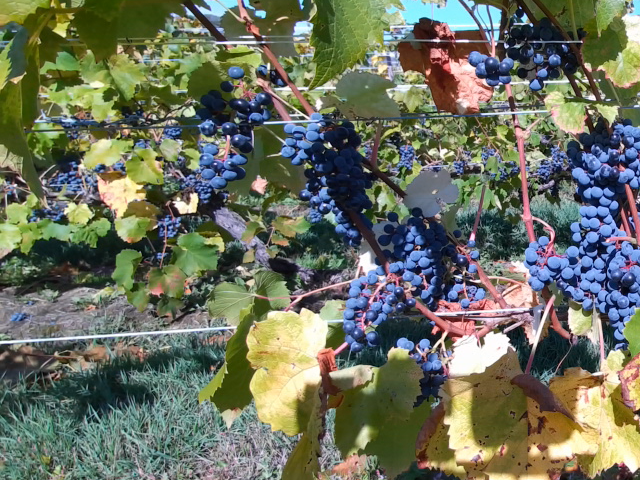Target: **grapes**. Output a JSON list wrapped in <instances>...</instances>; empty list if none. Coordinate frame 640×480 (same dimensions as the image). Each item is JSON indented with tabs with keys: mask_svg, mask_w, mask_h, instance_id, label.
Segmentation results:
<instances>
[{
	"mask_svg": "<svg viewBox=\"0 0 640 480\" xmlns=\"http://www.w3.org/2000/svg\"><path fill=\"white\" fill-rule=\"evenodd\" d=\"M566 156L576 166L572 177L579 182L576 194L587 202L579 208L581 222L569 226L571 241L580 243L564 251V257H540L550 239L540 236L523 253L529 268L528 286L541 291L556 282L565 297L582 302V310L594 306L607 312L613 338L625 341L624 323L631 320L640 307V246L606 239L626 237L619 230L618 208L627 201L623 186L640 189V127L632 119L616 123L607 133L599 117L595 132L579 134V143L567 144Z\"/></svg>",
	"mask_w": 640,
	"mask_h": 480,
	"instance_id": "01657485",
	"label": "grapes"
},
{
	"mask_svg": "<svg viewBox=\"0 0 640 480\" xmlns=\"http://www.w3.org/2000/svg\"><path fill=\"white\" fill-rule=\"evenodd\" d=\"M414 218H409L407 224H385L384 232L378 237L380 246H389L393 243L394 251L385 249L383 254L392 260L389 270L397 273L404 282H410L413 286L411 294L420 297L430 311L438 308L439 300L448 303H456L461 309H468L471 304L484 299L487 290L476 284L466 286V298L459 299V292L464 289V281L454 278L449 286L443 283L442 275L446 272V266L441 263L443 257H451V261L459 267H464L468 273L476 274L477 266L469 263V258L461 254L457 247L449 244L447 230L437 221L429 224V229L420 218L423 210L419 206L412 209ZM386 290L379 301L370 305V310L365 312V319L373 325H380L387 320L389 313L395 310L404 313L406 306L414 308L416 299L409 297L404 302H397V298L404 294V288L393 282L386 284Z\"/></svg>",
	"mask_w": 640,
	"mask_h": 480,
	"instance_id": "b958b902",
	"label": "grapes"
},
{
	"mask_svg": "<svg viewBox=\"0 0 640 480\" xmlns=\"http://www.w3.org/2000/svg\"><path fill=\"white\" fill-rule=\"evenodd\" d=\"M330 123H312L307 126L285 125L283 132L288 136L285 146L281 149V156L290 159V163L300 166L305 160H312L315 168H307L305 176L309 178L306 189L299 191L302 201H309L310 209L308 217L311 222H320L326 213L335 214V232L345 237L348 246H357L360 243L361 234L356 225L349 221L348 213L339 206L332 189L323 188L333 182V175L329 173L333 169V163L326 161L323 154L325 145L319 141L324 139L322 127H328Z\"/></svg>",
	"mask_w": 640,
	"mask_h": 480,
	"instance_id": "0513c4c2",
	"label": "grapes"
},
{
	"mask_svg": "<svg viewBox=\"0 0 640 480\" xmlns=\"http://www.w3.org/2000/svg\"><path fill=\"white\" fill-rule=\"evenodd\" d=\"M272 96L269 93H258L250 101L233 99L229 102V108L242 120L237 122H224L220 125V132L232 138V144L242 154L229 153L223 162L215 159L220 153V147L214 143H207L204 147V155L198 158L200 166H207L201 171V177L210 181L214 190H223L228 182L243 180L248 163V156L252 152V130L256 126H262L264 120L271 119V111L261 105H269Z\"/></svg>",
	"mask_w": 640,
	"mask_h": 480,
	"instance_id": "84f90ec7",
	"label": "grapes"
},
{
	"mask_svg": "<svg viewBox=\"0 0 640 480\" xmlns=\"http://www.w3.org/2000/svg\"><path fill=\"white\" fill-rule=\"evenodd\" d=\"M374 263L378 266L373 271L367 274V277H360L359 279H352L348 284V297L349 299L345 303V309L343 312V326L342 333L345 335V344L350 346L352 352H359L364 348V342L360 340L363 336V330L360 327V322L357 318H363L362 312H355L359 309H366L368 307V299L360 296L362 294L371 295L372 290L368 288L362 289V283L368 285H375L378 281V276L383 277L386 274V268L383 262L377 257L374 259Z\"/></svg>",
	"mask_w": 640,
	"mask_h": 480,
	"instance_id": "f8a65327",
	"label": "grapes"
},
{
	"mask_svg": "<svg viewBox=\"0 0 640 480\" xmlns=\"http://www.w3.org/2000/svg\"><path fill=\"white\" fill-rule=\"evenodd\" d=\"M468 62L471 67H474L476 76L484 79L489 87H496L499 83L504 85L506 82L512 81L511 70L514 68V60L511 57L499 61L487 54L471 51Z\"/></svg>",
	"mask_w": 640,
	"mask_h": 480,
	"instance_id": "5460f4e3",
	"label": "grapes"
},
{
	"mask_svg": "<svg viewBox=\"0 0 640 480\" xmlns=\"http://www.w3.org/2000/svg\"><path fill=\"white\" fill-rule=\"evenodd\" d=\"M558 78L560 76V71L556 68H551L548 70L547 68H542L537 71V77L539 79H532L529 83V88L532 91H540L544 87V82L542 80H547L549 78Z\"/></svg>",
	"mask_w": 640,
	"mask_h": 480,
	"instance_id": "83cd7487",
	"label": "grapes"
},
{
	"mask_svg": "<svg viewBox=\"0 0 640 480\" xmlns=\"http://www.w3.org/2000/svg\"><path fill=\"white\" fill-rule=\"evenodd\" d=\"M443 366V361L439 359V354L436 352L430 353L426 361L421 364V368L425 372H435L439 371Z\"/></svg>",
	"mask_w": 640,
	"mask_h": 480,
	"instance_id": "e5b3c951",
	"label": "grapes"
},
{
	"mask_svg": "<svg viewBox=\"0 0 640 480\" xmlns=\"http://www.w3.org/2000/svg\"><path fill=\"white\" fill-rule=\"evenodd\" d=\"M520 55L525 58H531L534 55V47L531 44H525L520 47ZM535 65H543L545 58L541 53H536L533 58Z\"/></svg>",
	"mask_w": 640,
	"mask_h": 480,
	"instance_id": "2adb6a1f",
	"label": "grapes"
},
{
	"mask_svg": "<svg viewBox=\"0 0 640 480\" xmlns=\"http://www.w3.org/2000/svg\"><path fill=\"white\" fill-rule=\"evenodd\" d=\"M545 53L548 57V65L550 67H560L563 64V57L557 54L556 47L554 45H549L545 48Z\"/></svg>",
	"mask_w": 640,
	"mask_h": 480,
	"instance_id": "ef6de9ee",
	"label": "grapes"
},
{
	"mask_svg": "<svg viewBox=\"0 0 640 480\" xmlns=\"http://www.w3.org/2000/svg\"><path fill=\"white\" fill-rule=\"evenodd\" d=\"M431 348V341L429 339H421L418 345V351L421 353H424L426 351V349H430ZM419 352H414L411 355L412 359H415V362L417 364H420L423 360L422 355Z\"/></svg>",
	"mask_w": 640,
	"mask_h": 480,
	"instance_id": "1ff8f66d",
	"label": "grapes"
},
{
	"mask_svg": "<svg viewBox=\"0 0 640 480\" xmlns=\"http://www.w3.org/2000/svg\"><path fill=\"white\" fill-rule=\"evenodd\" d=\"M394 347L413 351L415 348V343L411 339H409L407 336H400L399 338L396 339L394 343Z\"/></svg>",
	"mask_w": 640,
	"mask_h": 480,
	"instance_id": "54f908b8",
	"label": "grapes"
}]
</instances>
